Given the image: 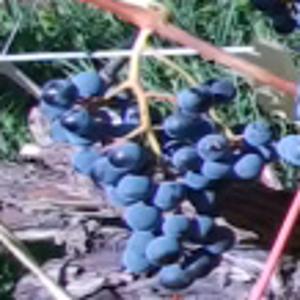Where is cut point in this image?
Segmentation results:
<instances>
[{
    "mask_svg": "<svg viewBox=\"0 0 300 300\" xmlns=\"http://www.w3.org/2000/svg\"><path fill=\"white\" fill-rule=\"evenodd\" d=\"M152 32L150 25H144L135 35L133 42V56L131 61V71L129 74V86L135 95L137 108L140 113V118L143 122L150 120V113L147 105V96L145 95L143 80L139 78L141 66V51L143 42L146 37Z\"/></svg>",
    "mask_w": 300,
    "mask_h": 300,
    "instance_id": "obj_1",
    "label": "cut point"
}]
</instances>
